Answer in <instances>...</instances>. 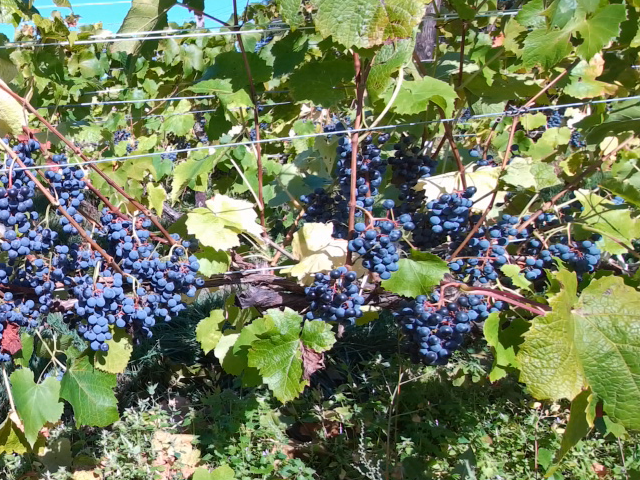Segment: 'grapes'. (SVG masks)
<instances>
[{
  "label": "grapes",
  "instance_id": "grapes-2",
  "mask_svg": "<svg viewBox=\"0 0 640 480\" xmlns=\"http://www.w3.org/2000/svg\"><path fill=\"white\" fill-rule=\"evenodd\" d=\"M373 136L368 134L362 141V154L358 153L355 163L358 171L356 203L367 211L374 209V199L379 194V188L384 180L386 166H391L393 177L391 184L401 192L397 194L399 202H404L396 207L393 199H384L382 206L386 210L392 209L395 220L401 227L412 233V238L416 245L425 248H436L445 243V237L450 235L453 242L449 245L451 250L457 248L458 242L464 237L462 233L472 230L477 220L478 214L469 216V208L473 205L472 197L476 188L468 186L461 194L445 192L437 197V200H429L426 207L432 212L427 214L415 212L420 208L421 202L425 199V189L415 192V187L419 180L432 177L436 173L437 160H430L428 156L420 155L418 147L411 148V154L402 148L401 144H395V156L386 159L382 157L381 148L372 143Z\"/></svg>",
  "mask_w": 640,
  "mask_h": 480
},
{
  "label": "grapes",
  "instance_id": "grapes-8",
  "mask_svg": "<svg viewBox=\"0 0 640 480\" xmlns=\"http://www.w3.org/2000/svg\"><path fill=\"white\" fill-rule=\"evenodd\" d=\"M603 236L601 234H593L590 239H583L576 243V248L583 251V254L578 256L572 252V248L568 246L569 239L567 237H561L559 242L555 245H551L549 249H542V243L539 239L529 242L526 253L530 256H537V258L526 257L523 263L529 267L526 272L528 279H538L543 275L544 269H551L553 267V256L561 258L564 262H569L574 266V271L577 273V280L582 282L584 275L587 272H592L595 269V265L599 263L601 259V250L596 248V241H601Z\"/></svg>",
  "mask_w": 640,
  "mask_h": 480
},
{
  "label": "grapes",
  "instance_id": "grapes-13",
  "mask_svg": "<svg viewBox=\"0 0 640 480\" xmlns=\"http://www.w3.org/2000/svg\"><path fill=\"white\" fill-rule=\"evenodd\" d=\"M475 164L478 167L489 165L490 167L495 168L497 166V162L493 160V157L491 155L486 156L484 159H477L475 161Z\"/></svg>",
  "mask_w": 640,
  "mask_h": 480
},
{
  "label": "grapes",
  "instance_id": "grapes-11",
  "mask_svg": "<svg viewBox=\"0 0 640 480\" xmlns=\"http://www.w3.org/2000/svg\"><path fill=\"white\" fill-rule=\"evenodd\" d=\"M41 143L37 140L34 141L32 138L28 140V144L20 141L18 145H14L12 149L17 153L19 158L25 163V165H34V160L31 155H33L36 150H39Z\"/></svg>",
  "mask_w": 640,
  "mask_h": 480
},
{
  "label": "grapes",
  "instance_id": "grapes-14",
  "mask_svg": "<svg viewBox=\"0 0 640 480\" xmlns=\"http://www.w3.org/2000/svg\"><path fill=\"white\" fill-rule=\"evenodd\" d=\"M572 206H573L574 208L578 209L579 211H583V210L585 209V206H584L581 202H579V201H574V202L572 203ZM572 206H571L570 204H563V205H562V210H563V211L571 210V209H572Z\"/></svg>",
  "mask_w": 640,
  "mask_h": 480
},
{
  "label": "grapes",
  "instance_id": "grapes-9",
  "mask_svg": "<svg viewBox=\"0 0 640 480\" xmlns=\"http://www.w3.org/2000/svg\"><path fill=\"white\" fill-rule=\"evenodd\" d=\"M336 137H340L338 139L339 146L336 148V153L341 155V158L337 162L338 168L336 169V173L340 176L339 184H340V194L335 196V199L331 197L326 190L323 188H317L314 193L307 195H301L299 200L302 203H312L317 197V204H312L308 209L307 213L303 215V218L307 222H313L315 220L321 224H325L330 218L331 214L328 211H324V205L328 204L329 206H333L335 204V200L338 205L336 207V212L334 214V218L339 222H345L349 217L350 207L349 201L351 199V189L349 186V176L351 175L350 170V157L352 155V144L349 140L342 134H335Z\"/></svg>",
  "mask_w": 640,
  "mask_h": 480
},
{
  "label": "grapes",
  "instance_id": "grapes-10",
  "mask_svg": "<svg viewBox=\"0 0 640 480\" xmlns=\"http://www.w3.org/2000/svg\"><path fill=\"white\" fill-rule=\"evenodd\" d=\"M61 171L62 174L54 171H46L44 174L51 181L52 189L57 192L58 203L77 223H81L83 218L76 213L85 198V193L81 191L86 188V182L82 180L85 173L75 166L62 167Z\"/></svg>",
  "mask_w": 640,
  "mask_h": 480
},
{
  "label": "grapes",
  "instance_id": "grapes-4",
  "mask_svg": "<svg viewBox=\"0 0 640 480\" xmlns=\"http://www.w3.org/2000/svg\"><path fill=\"white\" fill-rule=\"evenodd\" d=\"M13 186L7 189L0 186V223L7 227L17 224V231L27 232V237L18 236L14 229L4 232V240L0 241V249L8 251L10 266L15 265L16 257L29 255L32 251L49 252L58 232L38 225L36 230H30L31 222L25 214L27 208L33 207L32 197L35 195L36 184L25 175V172H13Z\"/></svg>",
  "mask_w": 640,
  "mask_h": 480
},
{
  "label": "grapes",
  "instance_id": "grapes-7",
  "mask_svg": "<svg viewBox=\"0 0 640 480\" xmlns=\"http://www.w3.org/2000/svg\"><path fill=\"white\" fill-rule=\"evenodd\" d=\"M374 228H380L379 236L374 229H369L361 237L368 225L364 222L355 223L352 239L347 242L350 252L362 255V266L370 272L379 274L381 280H388L392 272L399 269L398 247L393 243L400 239L402 231L396 229L393 221L375 220Z\"/></svg>",
  "mask_w": 640,
  "mask_h": 480
},
{
  "label": "grapes",
  "instance_id": "grapes-6",
  "mask_svg": "<svg viewBox=\"0 0 640 480\" xmlns=\"http://www.w3.org/2000/svg\"><path fill=\"white\" fill-rule=\"evenodd\" d=\"M342 275L345 276L342 281L345 290L344 293H336L334 289H330L331 279L338 280ZM357 276L356 271H349L344 266L331 269L328 275L317 272L314 284L305 288L312 300V304L309 306L311 311L306 313V317L317 321L342 319L349 326H353L356 323L355 318L363 316L360 306L365 304V298L358 294L359 289L352 284L353 279Z\"/></svg>",
  "mask_w": 640,
  "mask_h": 480
},
{
  "label": "grapes",
  "instance_id": "grapes-12",
  "mask_svg": "<svg viewBox=\"0 0 640 480\" xmlns=\"http://www.w3.org/2000/svg\"><path fill=\"white\" fill-rule=\"evenodd\" d=\"M545 222L547 226H554L558 224V219L553 212H550V213H544L541 217H539L536 220L537 224H543Z\"/></svg>",
  "mask_w": 640,
  "mask_h": 480
},
{
  "label": "grapes",
  "instance_id": "grapes-1",
  "mask_svg": "<svg viewBox=\"0 0 640 480\" xmlns=\"http://www.w3.org/2000/svg\"><path fill=\"white\" fill-rule=\"evenodd\" d=\"M103 216L99 218L103 226V232L111 242L121 241L116 245V256L122 260L123 270L127 275H134V278L142 283L144 280H151L155 294H148L144 286L137 289L139 297L147 299L148 307L144 309L137 307V301L133 298L125 297L123 290V276L114 272L112 267L107 268V261L97 251H80V245L73 242L69 245H56L54 252L57 256L51 258V267L55 270L50 272V280L43 281L44 275L49 272V267L44 266L42 259H34L33 264L30 259L25 260V269H17L16 278L12 279L14 286L31 287L33 293L38 297V302L42 304L39 311L33 309L35 301L28 299L22 302L17 299L14 303L0 305V339L3 338V331L8 322H15L19 326H26L31 330L37 326V319L41 314H47L52 305V293L56 289V282H62L65 286L71 287L72 280L66 276L72 272L88 271L95 269L103 277H109L112 285L104 286L97 282L94 289V280L89 274L83 277L76 275L74 281L77 286L72 288L73 296L77 298V303L63 315V321L70 323L76 314L83 318L88 324L80 323L77 326L78 333L90 342V348L95 351L107 352L113 334L110 332V324H115L118 328H124L127 323L132 324L136 319L142 320L140 329L148 340L154 338V334L149 327L157 325V318H163L166 323H170L173 318L179 316V312L187 309V304L181 301L180 292L188 297H194L198 288H203L205 280L196 277L200 271V259L194 255L188 256V263L183 262L182 266L187 270L181 273L179 258L185 255L181 247L173 249L170 259L160 261V254L152 251L156 246L152 242L138 247L137 240L128 232L132 228L130 221L116 220V215L103 207Z\"/></svg>",
  "mask_w": 640,
  "mask_h": 480
},
{
  "label": "grapes",
  "instance_id": "grapes-3",
  "mask_svg": "<svg viewBox=\"0 0 640 480\" xmlns=\"http://www.w3.org/2000/svg\"><path fill=\"white\" fill-rule=\"evenodd\" d=\"M486 296H460L457 303H447L438 310L427 305L426 295H417L414 309L393 310V319H400L403 334H410V341L419 345L418 356L425 365L447 364L463 342V334L472 331L470 322L487 319L491 313L506 309L505 301L496 300L493 307L484 303Z\"/></svg>",
  "mask_w": 640,
  "mask_h": 480
},
{
  "label": "grapes",
  "instance_id": "grapes-5",
  "mask_svg": "<svg viewBox=\"0 0 640 480\" xmlns=\"http://www.w3.org/2000/svg\"><path fill=\"white\" fill-rule=\"evenodd\" d=\"M501 220L496 225H490L487 228L488 235L493 240H498L497 244L490 246V242L484 238L486 235V226L481 225L478 231L474 234V238H471L467 242V247L473 249L472 251H461L457 256H474L483 258L484 254L490 249V257L493 260H487L483 265V261L478 258L457 259L455 263L450 264V269L453 273L461 278H465L467 275H471L470 282L489 283L490 280L495 281L499 278V273L496 272L500 269V266L507 264L505 254V248L509 245L508 238L510 235L515 237H530L531 230L524 229L519 232L518 228H512L517 226L520 222L519 216H513L509 213H503Z\"/></svg>",
  "mask_w": 640,
  "mask_h": 480
}]
</instances>
